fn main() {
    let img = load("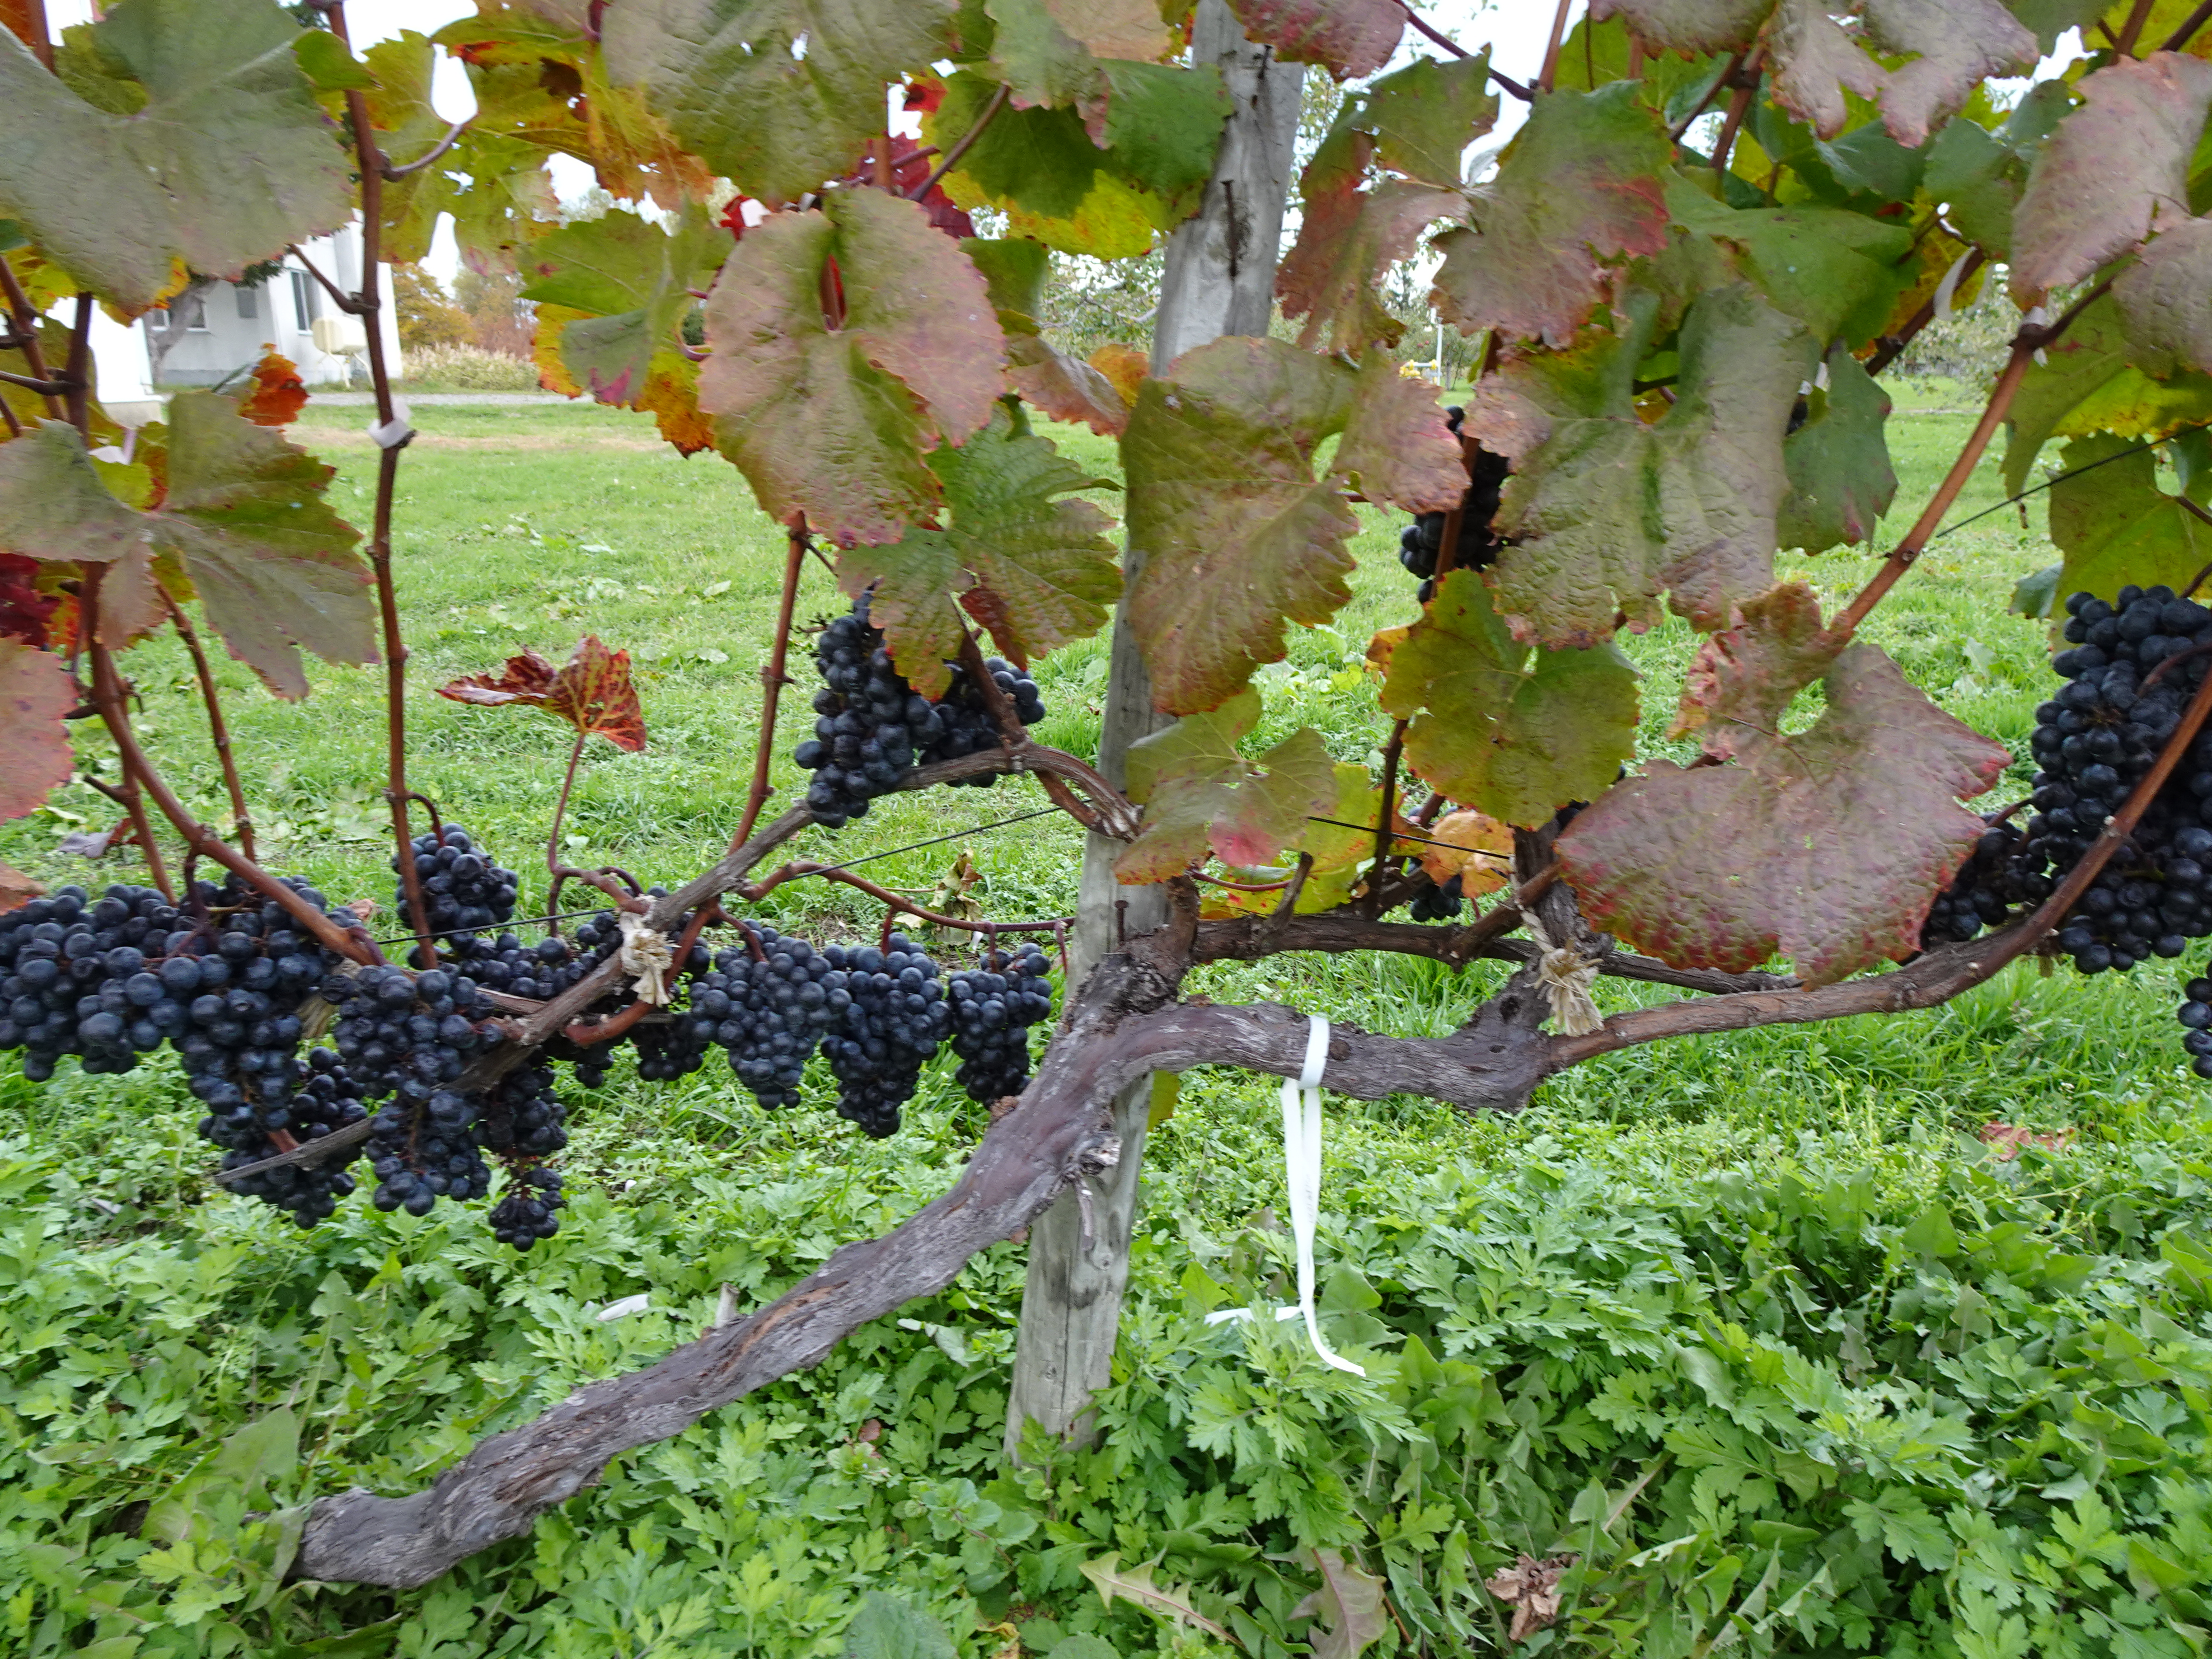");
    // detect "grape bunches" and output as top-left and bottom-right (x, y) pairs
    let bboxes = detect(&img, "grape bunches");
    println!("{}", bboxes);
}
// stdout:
(919, 654), (1052, 791)
(133, 1179), (165, 1207)
(388, 823), (522, 956)
(539, 1020), (630, 1092)
(624, 1014), (715, 1082)
(2052, 829), (2211, 977)
(1406, 851), (1468, 925)
(1892, 809), (2051, 967)
(320, 969), (501, 1223)
(790, 588), (945, 831)
(1395, 402), (1519, 609)
(2176, 956), (2212, 1092)
(685, 917), (850, 1119)
(946, 940), (1057, 1112)
(819, 931), (952, 1157)
(2023, 581), (2212, 868)
(129, 862), (366, 1136)
(2, 880), (168, 1089)
(406, 882), (723, 1012)
(473, 1042), (575, 1257)
(187, 1120), (366, 1234)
